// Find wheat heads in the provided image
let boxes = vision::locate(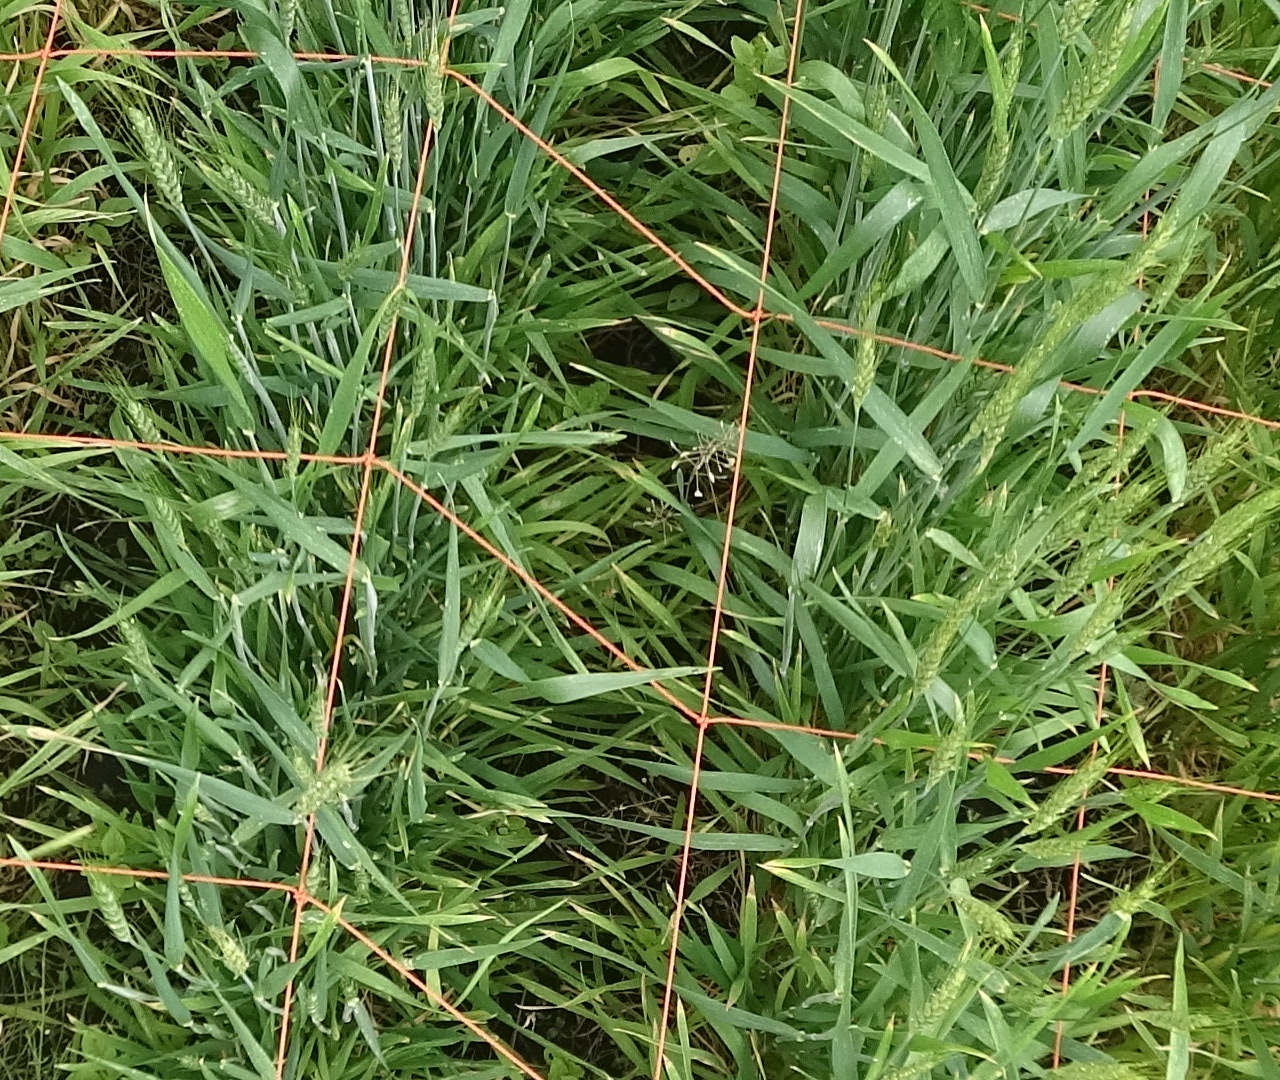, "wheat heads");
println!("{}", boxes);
[1047,1059,1128,1079]
[924,716,969,779]
[851,274,880,318]
[1128,1004,1210,1033]
[1056,0,1116,49]
[1049,13,1131,125]
[172,1052,202,1072]
[954,896,1011,943]
[354,492,375,540]
[1102,872,1165,923]
[410,342,429,414]
[1027,839,1085,863]
[1103,416,1161,486]
[1181,433,1236,498]
[1034,512,1082,556]
[973,550,1015,607]
[280,428,309,476]
[1018,749,1117,833]
[124,94,178,202]
[1044,550,1093,613]
[975,130,1007,203]
[415,54,443,128]
[1213,491,1273,539]
[294,775,346,827]
[1082,224,1166,296]
[202,518,230,556]
[298,855,322,902]
[872,507,897,546]
[908,591,967,696]
[454,592,500,645]
[282,0,297,33]
[948,852,991,871]
[797,880,817,910]
[118,614,147,661]
[1161,548,1227,595]
[877,1052,956,1078]
[149,489,181,541]
[127,397,178,458]
[978,391,1014,467]
[394,0,415,41]
[303,991,323,1025]
[190,798,212,820]
[998,29,1027,99]
[311,694,330,765]
[1060,590,1118,658]
[1087,487,1152,545]
[1088,622,1150,668]
[236,559,257,579]
[421,412,460,457]
[204,923,239,980]
[1049,442,1114,490]
[292,276,308,307]
[906,969,971,1023]
[91,874,139,942]
[839,337,879,410]
[374,289,402,341]
[159,857,202,913]
[959,352,1040,442]
[216,166,272,222]
[200,1021,229,1041]
[341,249,362,274]
[382,97,409,175]
[223,343,251,386]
